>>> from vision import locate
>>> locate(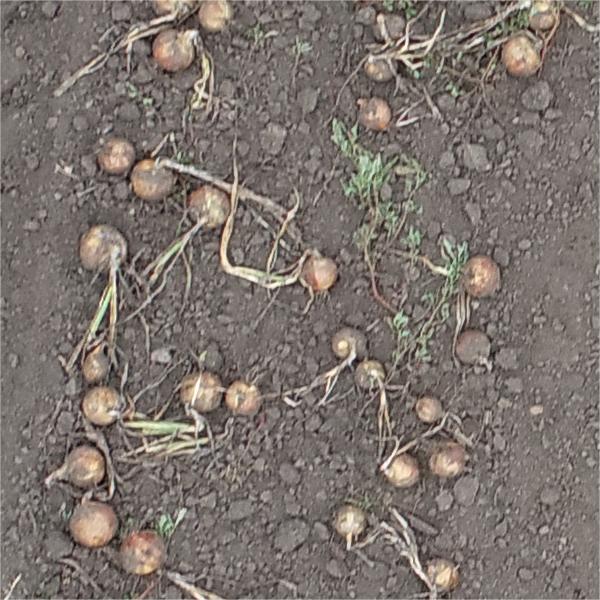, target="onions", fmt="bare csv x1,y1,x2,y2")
425,558,458,590
81,346,109,382
130,156,172,199
459,256,498,296
355,361,384,391
82,384,120,424
331,503,365,540
364,54,393,81
329,329,362,359
154,30,193,68
96,135,133,175
77,226,126,272
195,3,231,33
62,444,101,487
501,33,541,76
150,0,196,19
186,187,228,227
224,378,257,414
356,97,391,131
382,451,418,486
414,393,442,421
427,441,461,477
452,330,490,366
300,253,336,289
179,372,218,410
70,499,116,546
528,4,556,33
114,530,164,575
